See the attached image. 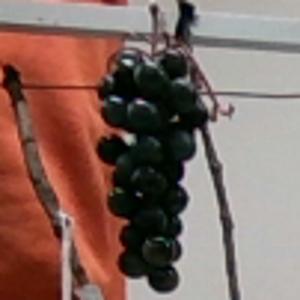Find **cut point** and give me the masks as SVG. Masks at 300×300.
Instances as JSON below:
<instances>
[{
	"label": "cut point",
	"instance_id": "1",
	"mask_svg": "<svg viewBox=\"0 0 300 300\" xmlns=\"http://www.w3.org/2000/svg\"><path fill=\"white\" fill-rule=\"evenodd\" d=\"M160 13L159 0H149L146 4V14L150 17V57L154 64H157L158 16Z\"/></svg>",
	"mask_w": 300,
	"mask_h": 300
}]
</instances>
